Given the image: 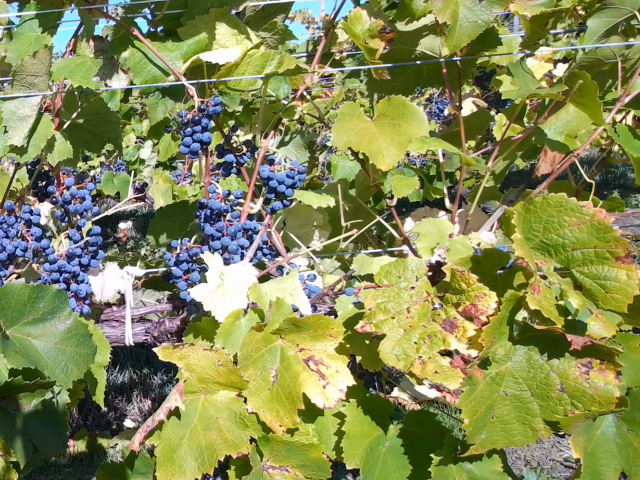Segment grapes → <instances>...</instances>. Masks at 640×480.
<instances>
[{
	"instance_id": "f8a65327",
	"label": "grapes",
	"mask_w": 640,
	"mask_h": 480,
	"mask_svg": "<svg viewBox=\"0 0 640 480\" xmlns=\"http://www.w3.org/2000/svg\"><path fill=\"white\" fill-rule=\"evenodd\" d=\"M210 102L213 104L211 107L206 105H200L198 112L200 114L194 115L192 118L188 117L190 111L185 108L178 110V116L182 118L181 124L187 126L183 129L184 137L180 140L179 153L182 156L189 155L192 160H196L200 157V150L203 148V144L210 146L212 144L211 122L215 115H219L222 112L221 97L219 95H213L210 98Z\"/></svg>"
},
{
	"instance_id": "83cd7487",
	"label": "grapes",
	"mask_w": 640,
	"mask_h": 480,
	"mask_svg": "<svg viewBox=\"0 0 640 480\" xmlns=\"http://www.w3.org/2000/svg\"><path fill=\"white\" fill-rule=\"evenodd\" d=\"M270 233L265 232L262 240L258 244L255 254L251 260L253 265H257L260 262L261 258H274V254L277 252V248L275 246H268Z\"/></svg>"
},
{
	"instance_id": "84f90ec7",
	"label": "grapes",
	"mask_w": 640,
	"mask_h": 480,
	"mask_svg": "<svg viewBox=\"0 0 640 480\" xmlns=\"http://www.w3.org/2000/svg\"><path fill=\"white\" fill-rule=\"evenodd\" d=\"M276 160L275 155H269L267 157L268 165H261L258 173L259 178L263 181L262 187L266 189L263 204L268 206L266 212L270 215L276 214L285 207H290L293 200L288 197H292L295 194V189H299L303 181L308 178V169L305 166H300L298 160L289 162L293 169L278 172L271 169Z\"/></svg>"
},
{
	"instance_id": "b958b902",
	"label": "grapes",
	"mask_w": 640,
	"mask_h": 480,
	"mask_svg": "<svg viewBox=\"0 0 640 480\" xmlns=\"http://www.w3.org/2000/svg\"><path fill=\"white\" fill-rule=\"evenodd\" d=\"M209 198L199 199L196 202V208L193 216L199 218L198 228L208 236L210 242L203 247L192 246L187 248L190 243L188 237H184L180 243L173 239L170 246L180 251L175 256L171 252H165L163 259L167 262V266L171 269L172 275L167 277L169 285H175L180 291L179 298L185 300L187 306L185 311L194 314L197 311L196 300L190 296L187 290L192 283L196 286L201 284L202 278L200 273H206L208 267L205 264H198L194 259L202 254L218 253L222 255L224 263L233 265L243 260L246 251L250 250L252 243L262 230V224L254 218L253 214H249L245 218V222H239L240 211L234 210L240 204L239 200L244 198V192L236 189L233 192V198L229 205H221L219 201V192L214 185L208 186Z\"/></svg>"
},
{
	"instance_id": "e5b3c951",
	"label": "grapes",
	"mask_w": 640,
	"mask_h": 480,
	"mask_svg": "<svg viewBox=\"0 0 640 480\" xmlns=\"http://www.w3.org/2000/svg\"><path fill=\"white\" fill-rule=\"evenodd\" d=\"M297 280L300 283H304L306 280L309 283H315L317 281V276L314 273L309 274L306 278L303 274H299L297 276ZM306 283L304 285V293L308 299H312L314 296H318L321 293V288L319 286H315L313 284Z\"/></svg>"
},
{
	"instance_id": "01657485",
	"label": "grapes",
	"mask_w": 640,
	"mask_h": 480,
	"mask_svg": "<svg viewBox=\"0 0 640 480\" xmlns=\"http://www.w3.org/2000/svg\"><path fill=\"white\" fill-rule=\"evenodd\" d=\"M42 210L34 208L30 204L21 207V216L0 215V287L5 285L8 278V271L4 267V262L13 254L17 258L30 260L34 265L39 263V256L34 252H41L47 261L42 263V270L49 274H43L34 280L36 285H44L58 282V287L66 292L69 299L68 309L83 316H89L91 309V296L93 288L88 284L91 268H97L99 261L106 257L105 252L99 247L103 244L100 236L102 229L98 225H93L87 230L90 238L84 244L73 246L83 240L77 229L68 232V240L65 244L66 260H59L54 254L55 248L49 239H42L41 225ZM30 228L32 241H24L20 238L21 224Z\"/></svg>"
},
{
	"instance_id": "0513c4c2",
	"label": "grapes",
	"mask_w": 640,
	"mask_h": 480,
	"mask_svg": "<svg viewBox=\"0 0 640 480\" xmlns=\"http://www.w3.org/2000/svg\"><path fill=\"white\" fill-rule=\"evenodd\" d=\"M40 164L41 160L39 158L29 163L32 169H27L28 180L33 179L31 188L37 190L33 193V196L39 203H44L46 199H49L53 206L61 208L54 212L56 220L62 224H67L70 214H78L80 218L77 225L84 227L87 224V211H90L93 216L100 214V208L92 204L91 191L96 189V185L93 182L87 183L83 190H78L77 188H71L74 185V179L67 177L64 180V186L71 189L68 193H64L59 200L57 196H52L57 192V187L54 185L55 179L51 177V173L48 170H39L37 172L34 168Z\"/></svg>"
},
{
	"instance_id": "5460f4e3",
	"label": "grapes",
	"mask_w": 640,
	"mask_h": 480,
	"mask_svg": "<svg viewBox=\"0 0 640 480\" xmlns=\"http://www.w3.org/2000/svg\"><path fill=\"white\" fill-rule=\"evenodd\" d=\"M243 145L247 148L245 153H243L239 159L234 157L229 149H225L223 144H218L214 147L216 151V157L219 160L224 158L225 162H217L215 164V169L220 171L224 178H230L232 175L239 176L241 174L240 169L236 166H233L234 163H238L239 165H245L248 160L253 157V153L257 151V147L254 145V142L250 139H246L243 142Z\"/></svg>"
}]
</instances>
